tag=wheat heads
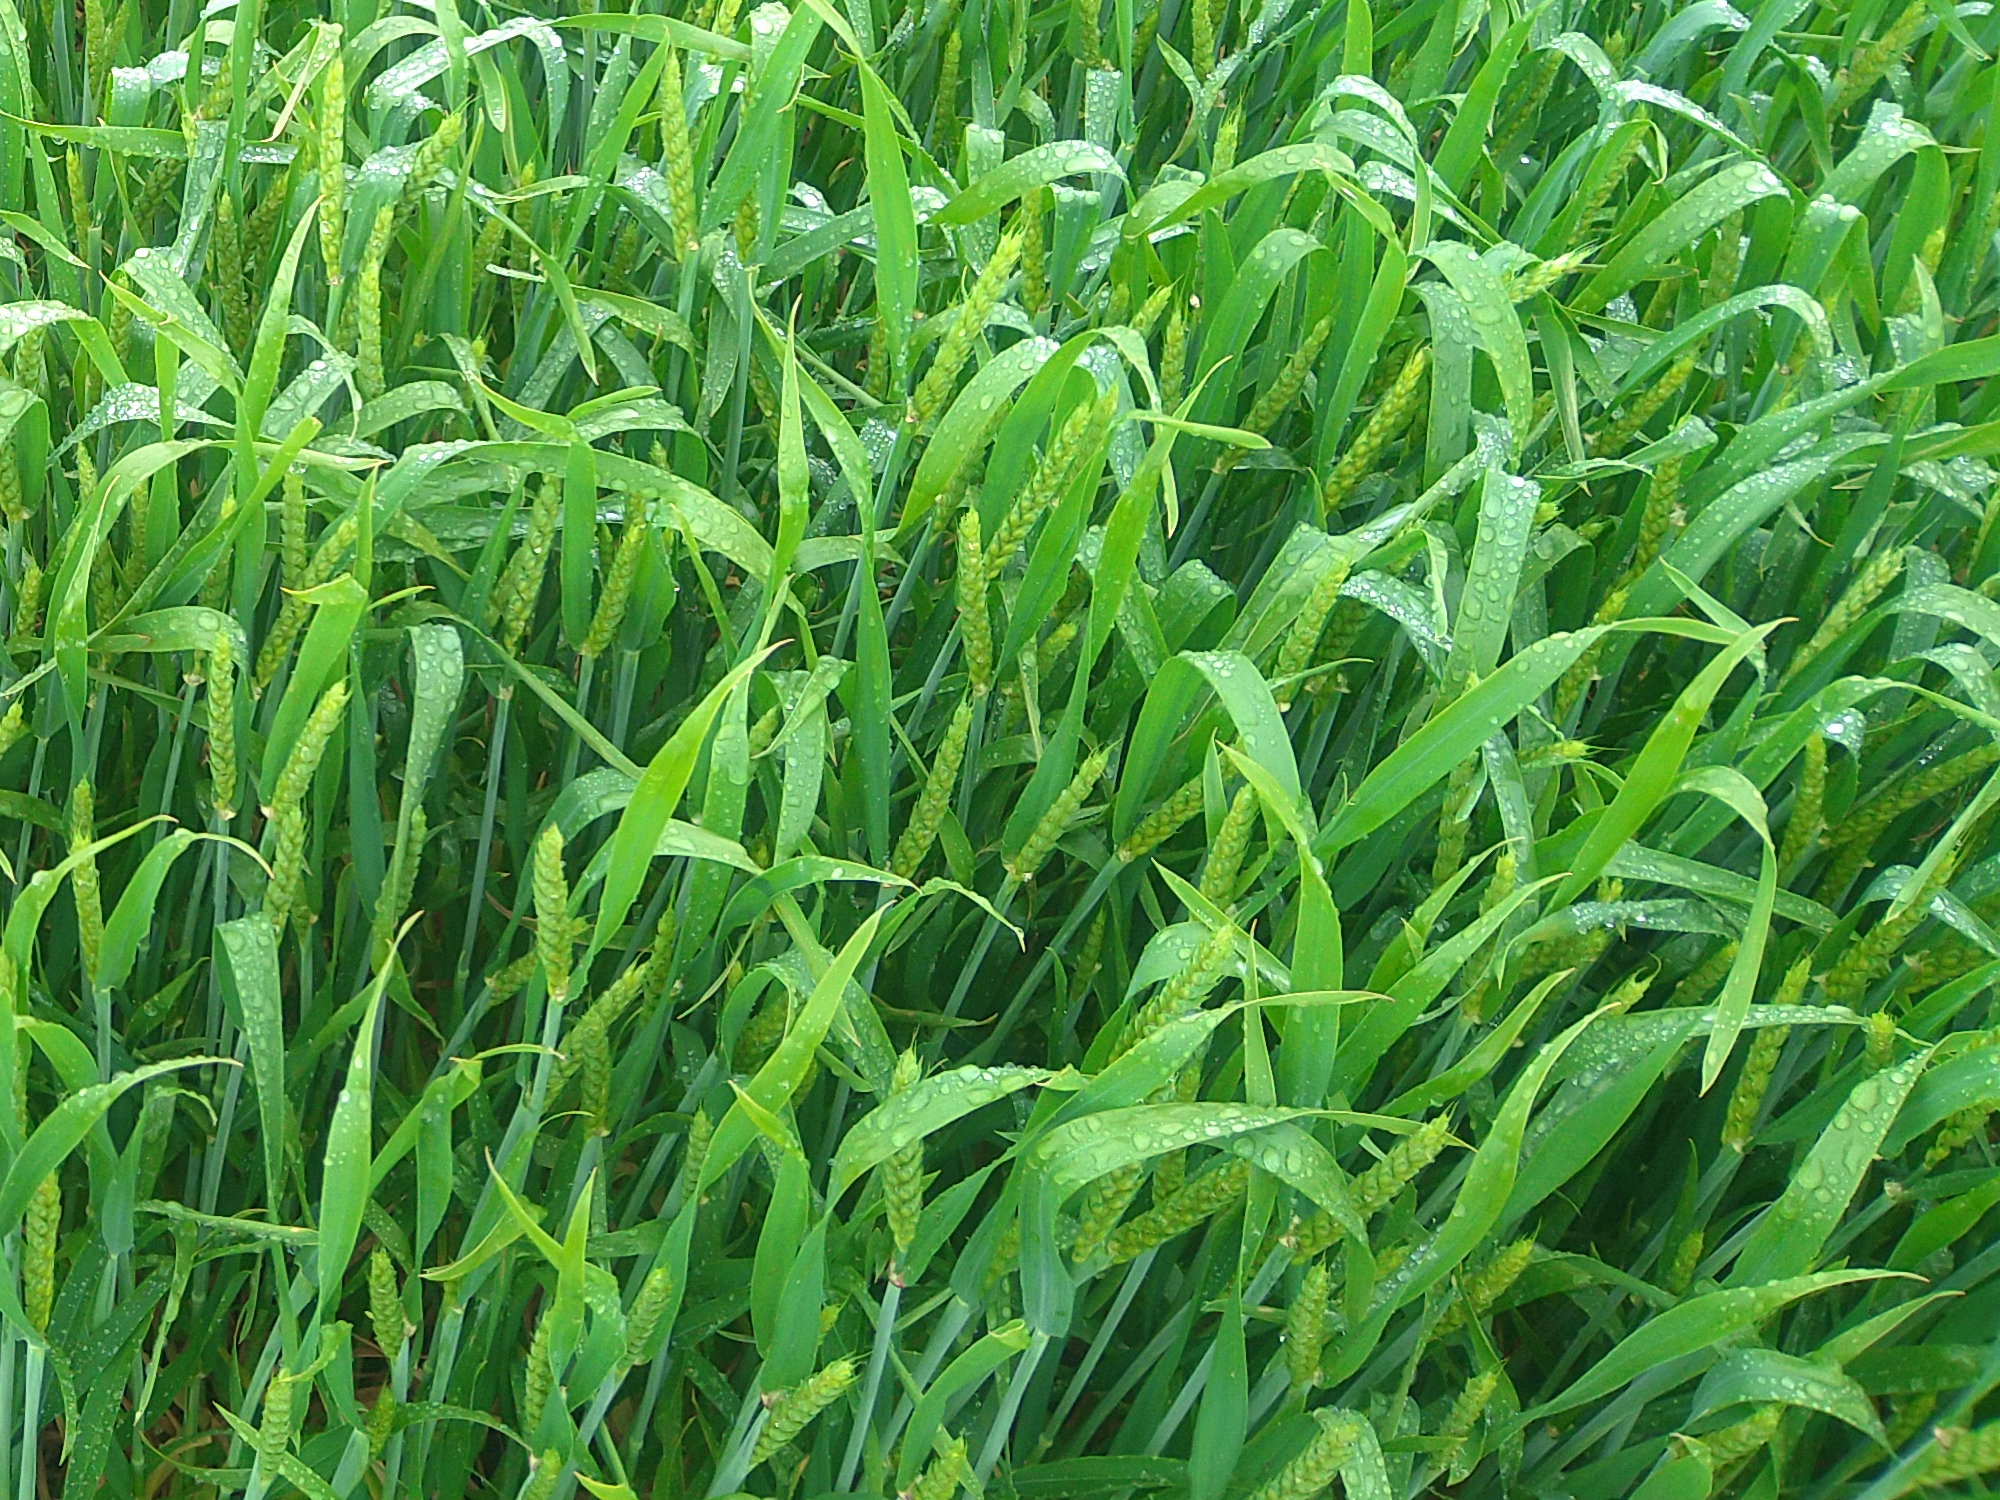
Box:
[1504,246,1588,314]
[72,449,112,628]
[18,563,42,639]
[1870,1247,1948,1319]
[1189,0,1212,79]
[735,187,757,258]
[1780,733,1825,853]
[1667,1231,1704,1302]
[885,1047,925,1249]
[940,0,980,31]
[242,169,289,264]
[1134,283,1175,343]
[1831,730,1999,844]
[715,0,742,39]
[485,914,593,1005]
[1210,117,1236,183]
[1482,844,1522,916]
[656,52,695,259]
[1071,1159,1147,1260]
[1152,1040,1207,1200]
[366,1390,396,1458]
[81,0,104,93]
[539,966,645,1105]
[1271,569,1342,705]
[72,776,93,841]
[259,1364,290,1477]
[27,1171,61,1338]
[278,681,348,820]
[696,0,714,28]
[259,515,358,693]
[1011,747,1110,885]
[737,996,797,1083]
[1899,224,1944,319]
[1386,49,1406,87]
[583,1017,612,1137]
[744,706,777,762]
[69,832,106,977]
[1208,0,1251,25]
[133,150,188,233]
[815,1297,840,1339]
[958,507,996,693]
[318,57,345,283]
[38,0,54,27]
[15,315,52,395]
[1111,1161,1255,1272]
[523,1447,558,1499]
[743,1361,859,1469]
[385,110,459,241]
[938,31,963,142]
[0,702,18,801]
[1108,923,1239,1066]
[1441,1229,1539,1334]
[1071,0,1101,65]
[389,800,428,935]
[997,619,1077,746]
[1902,1421,2000,1488]
[101,0,128,72]
[109,274,128,364]
[1424,751,1479,881]
[1568,118,1644,240]
[1601,34,1628,72]
[1813,830,1880,903]
[1520,733,1589,775]
[1131,8,1155,69]
[1823,850,1955,1013]
[199,40,240,134]
[754,845,772,871]
[216,192,252,352]
[984,1216,1036,1282]
[880,702,968,882]
[1281,1264,1333,1385]
[1438,1368,1503,1458]
[1639,446,1683,567]
[8,1039,27,1135]
[198,539,230,612]
[1489,47,1558,164]
[509,478,559,647]
[579,528,636,661]
[1788,543,1909,675]
[361,257,393,391]
[482,543,527,635]
[339,202,392,346]
[464,206,503,290]
[1070,906,1106,1007]
[1654,939,1740,1013]
[725,956,746,1002]
[206,636,239,811]
[1331,347,1425,506]
[132,475,148,569]
[1697,199,1750,318]
[1869,1393,1934,1454]
[1930,1085,2000,1163]
[283,465,307,599]
[685,1111,711,1200]
[1115,735,1247,861]
[914,1434,965,1500]
[1824,0,1926,119]
[1194,782,1256,908]
[1553,590,1626,714]
[254,808,307,936]
[1256,1419,1355,1500]
[985,407,1090,575]
[0,944,16,992]
[1526,924,1606,1043]
[643,904,678,1011]
[531,824,576,1001]
[1692,1408,1779,1464]
[746,352,776,430]
[0,432,22,511]
[369,1249,400,1355]
[508,163,536,294]
[1536,497,1558,523]
[1312,521,1432,687]
[913,231,1018,428]
[1158,307,1188,413]
[864,325,891,410]
[1578,514,1605,543]
[1291,1117,1449,1264]
[1222,315,1331,458]
[525,1306,559,1431]
[64,144,91,263]
[508,0,525,25]
[1905,937,1986,1006]
[621,1260,676,1368]
[1784,294,1839,374]
[1108,279,1124,335]
[1720,952,1813,1150]
[1864,1014,1895,1077]
[1590,352,1691,468]
[1018,185,1047,303]
[606,221,639,290]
